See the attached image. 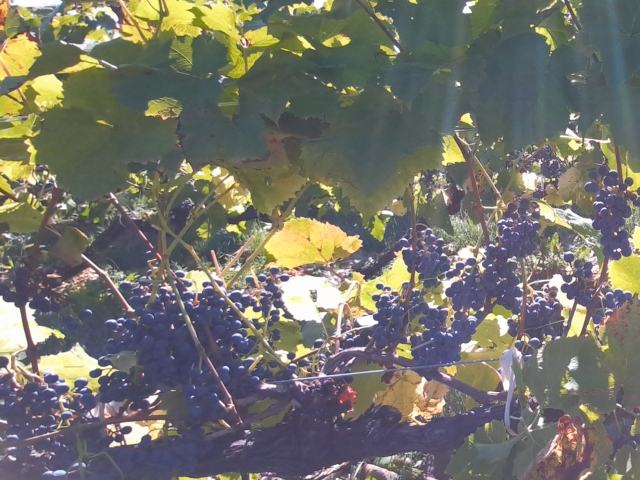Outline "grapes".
Here are the masks:
<instances>
[{
    "instance_id": "1",
    "label": "grapes",
    "mask_w": 640,
    "mask_h": 480,
    "mask_svg": "<svg viewBox=\"0 0 640 480\" xmlns=\"http://www.w3.org/2000/svg\"><path fill=\"white\" fill-rule=\"evenodd\" d=\"M151 275L152 270L148 269L146 276L138 278L139 285L134 286L130 282L119 284L121 291L133 293L129 303L135 315L142 318L107 319L105 327L108 330L129 331L121 335V340L107 338L103 346L105 354L140 349L139 365L144 367L143 376L132 382L124 371H115L109 377L101 376L100 368L91 369V378L100 377V401L123 402L128 398L132 410H148L150 402L145 398L150 397L156 389L160 393H169L171 388H176L180 383L187 404L202 401L206 406L191 407V420L223 419L224 397L207 366L200 364L172 293H167V289L159 283L158 296L151 301L148 292H151L153 284L145 282L151 280Z\"/></svg>"
},
{
    "instance_id": "2",
    "label": "grapes",
    "mask_w": 640,
    "mask_h": 480,
    "mask_svg": "<svg viewBox=\"0 0 640 480\" xmlns=\"http://www.w3.org/2000/svg\"><path fill=\"white\" fill-rule=\"evenodd\" d=\"M530 201L522 198L519 206L510 202L504 218L497 221L498 233L502 236L503 244L497 249L495 244L485 247L482 262L486 268L484 275L475 268H467L463 280L453 282L451 287L445 289V295L452 298V308L456 311L451 322L449 332L439 331L438 326L447 320V311L443 307L431 309L423 302L418 289L412 290L410 306L415 314L429 315L420 318V324L428 331L423 337L413 335L410 338L412 358L417 364L453 362L461 359L460 350L462 343H469L471 335L477 333L476 322L473 319H462L463 307L478 311L475 314L477 321L485 319V313L479 311L485 304L487 296L497 298V304L514 314L521 312L522 291L518 285L520 278L511 271L517 268L515 261H508V257L531 256L538 249V245L532 242L538 236L536 231L541 229L538 221H527V207Z\"/></svg>"
},
{
    "instance_id": "3",
    "label": "grapes",
    "mask_w": 640,
    "mask_h": 480,
    "mask_svg": "<svg viewBox=\"0 0 640 480\" xmlns=\"http://www.w3.org/2000/svg\"><path fill=\"white\" fill-rule=\"evenodd\" d=\"M185 277L183 271H177L175 278L180 291V296L192 318L198 338L205 351L209 354L215 368L219 372L224 385L228 390H234L237 386L257 385L262 380H269L273 377L271 370H265L257 366L254 370H249L255 362L253 357H248L240 361L237 354L250 352L256 344L254 336L248 337V325L237 316L228 306L227 302L214 290L210 281L201 283L202 292L198 295V305L192 302L195 299V291L187 290L192 286L191 281H180ZM201 323H209L210 331L215 338L221 353V357L214 356L207 336L201 327Z\"/></svg>"
},
{
    "instance_id": "4",
    "label": "grapes",
    "mask_w": 640,
    "mask_h": 480,
    "mask_svg": "<svg viewBox=\"0 0 640 480\" xmlns=\"http://www.w3.org/2000/svg\"><path fill=\"white\" fill-rule=\"evenodd\" d=\"M101 426L87 429L80 433V437L87 442L89 453L105 451L115 455V464L123 470L127 480H171L170 469L174 467L194 468L197 455L202 446L200 437L205 435L202 426H196L188 431L182 439L178 436L156 438L153 442L149 434H144L138 443V450L134 446L125 448L108 446L113 441L121 443L124 435L130 434L132 428L124 426L113 439L101 433Z\"/></svg>"
},
{
    "instance_id": "5",
    "label": "grapes",
    "mask_w": 640,
    "mask_h": 480,
    "mask_svg": "<svg viewBox=\"0 0 640 480\" xmlns=\"http://www.w3.org/2000/svg\"><path fill=\"white\" fill-rule=\"evenodd\" d=\"M14 374L7 372L0 380V420L8 424V433L24 439L56 428V394H67L69 386L52 371L42 373V382H25L23 389L14 385Z\"/></svg>"
},
{
    "instance_id": "6",
    "label": "grapes",
    "mask_w": 640,
    "mask_h": 480,
    "mask_svg": "<svg viewBox=\"0 0 640 480\" xmlns=\"http://www.w3.org/2000/svg\"><path fill=\"white\" fill-rule=\"evenodd\" d=\"M378 290H383L390 295L374 293L372 300L376 302L378 312L373 314V319L377 321L371 327L358 330L356 334H347L339 342L341 349H350L353 346L365 347L369 343V337L375 342L378 348H386L390 343L405 344L407 337L401 332L406 325V310L402 306H397L399 292L393 290L389 285L378 283Z\"/></svg>"
},
{
    "instance_id": "7",
    "label": "grapes",
    "mask_w": 640,
    "mask_h": 480,
    "mask_svg": "<svg viewBox=\"0 0 640 480\" xmlns=\"http://www.w3.org/2000/svg\"><path fill=\"white\" fill-rule=\"evenodd\" d=\"M418 237L420 238L417 241V253L413 252L409 247L412 244V239L410 237L400 238L398 240V245L401 248H405L402 252L404 264L407 266V273L411 274V263L412 261L416 263V271L421 273L418 276L420 281H423V286L425 288H430L431 286H436L438 284V280H442L445 277L448 279H452L453 277H459L461 275V271L466 264L468 266H474L476 264V259L474 257L468 258L466 263L464 261H458L455 265L454 270H449L450 264L447 262V256L443 254L445 240L443 238H437L432 234V230L430 228H426L425 230H420L418 232Z\"/></svg>"
},
{
    "instance_id": "8",
    "label": "grapes",
    "mask_w": 640,
    "mask_h": 480,
    "mask_svg": "<svg viewBox=\"0 0 640 480\" xmlns=\"http://www.w3.org/2000/svg\"><path fill=\"white\" fill-rule=\"evenodd\" d=\"M592 208L598 212L595 214V220L592 226L595 230H600L603 234L601 244L604 246L603 254L610 257L614 261L632 255V249L629 246L628 232L621 230L620 226L626 223L625 218L632 216V208L630 204L622 199L619 195L608 193L602 189L595 197Z\"/></svg>"
},
{
    "instance_id": "9",
    "label": "grapes",
    "mask_w": 640,
    "mask_h": 480,
    "mask_svg": "<svg viewBox=\"0 0 640 480\" xmlns=\"http://www.w3.org/2000/svg\"><path fill=\"white\" fill-rule=\"evenodd\" d=\"M536 300L534 303L528 302L526 309L525 332L532 337L526 353L531 355L534 348H538L546 341L547 335L556 338L564 328L560 325L562 318V305L559 302L549 300L548 302L538 293L533 294Z\"/></svg>"
},
{
    "instance_id": "10",
    "label": "grapes",
    "mask_w": 640,
    "mask_h": 480,
    "mask_svg": "<svg viewBox=\"0 0 640 480\" xmlns=\"http://www.w3.org/2000/svg\"><path fill=\"white\" fill-rule=\"evenodd\" d=\"M63 444L65 446H61L58 441L49 439L38 441L33 445L36 452H52V458L45 462V467L51 470H47L42 475V480H64L67 477L65 470L77 455L74 433L63 436Z\"/></svg>"
},
{
    "instance_id": "11",
    "label": "grapes",
    "mask_w": 640,
    "mask_h": 480,
    "mask_svg": "<svg viewBox=\"0 0 640 480\" xmlns=\"http://www.w3.org/2000/svg\"><path fill=\"white\" fill-rule=\"evenodd\" d=\"M258 280L263 282L265 289L260 292L262 306L258 304L256 300L252 299L250 295H244L242 292L237 290L230 291L228 295L241 312L245 313L248 308L253 307L255 312L261 311L263 316H267L271 308V300L274 302L273 306L275 308H280L282 306V302L280 301L281 294L278 287L274 285L272 281L267 279L265 275H260Z\"/></svg>"
},
{
    "instance_id": "12",
    "label": "grapes",
    "mask_w": 640,
    "mask_h": 480,
    "mask_svg": "<svg viewBox=\"0 0 640 480\" xmlns=\"http://www.w3.org/2000/svg\"><path fill=\"white\" fill-rule=\"evenodd\" d=\"M0 296L6 304H13L15 308L24 307L28 303V308L30 310H35L37 308L39 313L59 311L61 309V304L59 302H49L43 296H35L28 302L29 294L27 292L13 291L5 285H0Z\"/></svg>"
},
{
    "instance_id": "13",
    "label": "grapes",
    "mask_w": 640,
    "mask_h": 480,
    "mask_svg": "<svg viewBox=\"0 0 640 480\" xmlns=\"http://www.w3.org/2000/svg\"><path fill=\"white\" fill-rule=\"evenodd\" d=\"M632 297L630 291H624L622 289L608 290L606 292V299L600 298L596 304V312L592 317L594 324H599L603 320V316L612 315L614 309H618L628 299Z\"/></svg>"
},
{
    "instance_id": "14",
    "label": "grapes",
    "mask_w": 640,
    "mask_h": 480,
    "mask_svg": "<svg viewBox=\"0 0 640 480\" xmlns=\"http://www.w3.org/2000/svg\"><path fill=\"white\" fill-rule=\"evenodd\" d=\"M74 400L66 398L64 400V406L68 410L82 411L84 405H92L95 402V394L88 386V380L86 378H78L73 383Z\"/></svg>"
},
{
    "instance_id": "15",
    "label": "grapes",
    "mask_w": 640,
    "mask_h": 480,
    "mask_svg": "<svg viewBox=\"0 0 640 480\" xmlns=\"http://www.w3.org/2000/svg\"><path fill=\"white\" fill-rule=\"evenodd\" d=\"M562 282L564 284L561 286V291L567 293L569 300L575 299V302L582 307H588L591 304L593 291L591 289L585 291L581 281H573L571 274H564Z\"/></svg>"
},
{
    "instance_id": "16",
    "label": "grapes",
    "mask_w": 640,
    "mask_h": 480,
    "mask_svg": "<svg viewBox=\"0 0 640 480\" xmlns=\"http://www.w3.org/2000/svg\"><path fill=\"white\" fill-rule=\"evenodd\" d=\"M598 174L602 177H605L603 179V184L606 187H613V186H618L622 191H626L628 189V185L632 186L634 184V181L631 177H628L625 182L620 183L619 182V173L618 170H610V168L606 165H601L598 168V171L596 169H592L589 173L588 176L592 179V180H596L598 178Z\"/></svg>"
},
{
    "instance_id": "17",
    "label": "grapes",
    "mask_w": 640,
    "mask_h": 480,
    "mask_svg": "<svg viewBox=\"0 0 640 480\" xmlns=\"http://www.w3.org/2000/svg\"><path fill=\"white\" fill-rule=\"evenodd\" d=\"M311 363H312V360H311L310 358H306V359H305V358L298 359V360L296 361V364H295V363H290V364L287 366V369H284V370L282 371V373H279V374L277 375V378H278V379H282V378H290V377H291V374H294V373L296 372V370H297V365H298L299 367H307V366H309Z\"/></svg>"
},
{
    "instance_id": "18",
    "label": "grapes",
    "mask_w": 640,
    "mask_h": 480,
    "mask_svg": "<svg viewBox=\"0 0 640 480\" xmlns=\"http://www.w3.org/2000/svg\"><path fill=\"white\" fill-rule=\"evenodd\" d=\"M575 268L577 269L574 272L576 277L584 276L586 279H589L592 276L591 271L594 269V264L592 262L577 260L575 262Z\"/></svg>"
}]
</instances>
